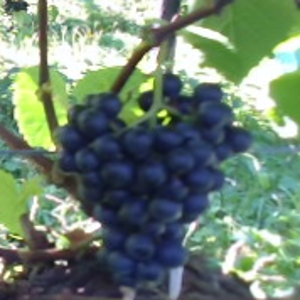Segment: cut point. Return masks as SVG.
<instances>
[{"label":"cut point","mask_w":300,"mask_h":300,"mask_svg":"<svg viewBox=\"0 0 300 300\" xmlns=\"http://www.w3.org/2000/svg\"><path fill=\"white\" fill-rule=\"evenodd\" d=\"M167 57V43L163 42L162 45L159 46L157 61H156V71L154 74V81L161 77V74L165 70V62Z\"/></svg>","instance_id":"6a23745f"}]
</instances>
